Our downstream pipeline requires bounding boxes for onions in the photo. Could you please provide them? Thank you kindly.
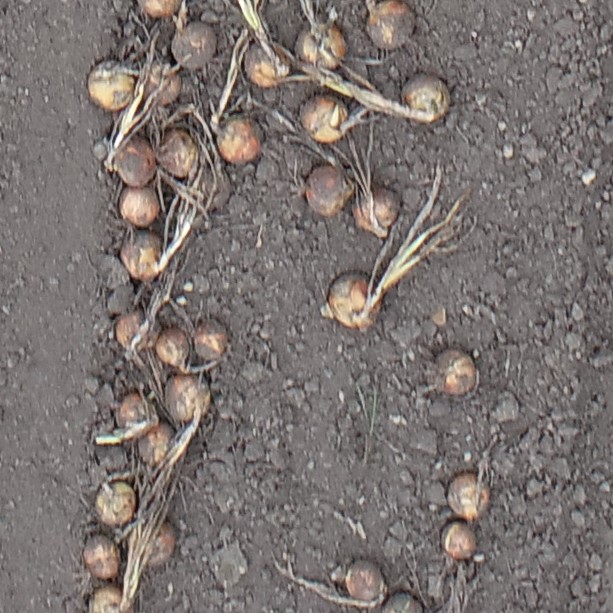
[85,61,136,109]
[110,138,155,186]
[172,22,217,67]
[302,162,350,215]
[156,130,200,177]
[365,3,410,47]
[93,481,136,524]
[439,520,475,558]
[160,374,209,420]
[447,473,486,517]
[299,96,345,140]
[82,539,118,578]
[118,234,163,278]
[119,187,159,225]
[299,25,344,65]
[433,348,476,394]
[115,312,147,346]
[357,189,398,232]
[87,584,124,612]
[246,44,288,85]
[145,68,181,106]
[141,424,175,465]
[189,322,225,363]
[381,590,421,613]
[325,273,374,327]
[142,521,181,563]
[216,114,262,162]
[154,329,190,365]
[400,73,447,121]
[137,0,177,21]
[343,559,381,598]
[117,391,149,426]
